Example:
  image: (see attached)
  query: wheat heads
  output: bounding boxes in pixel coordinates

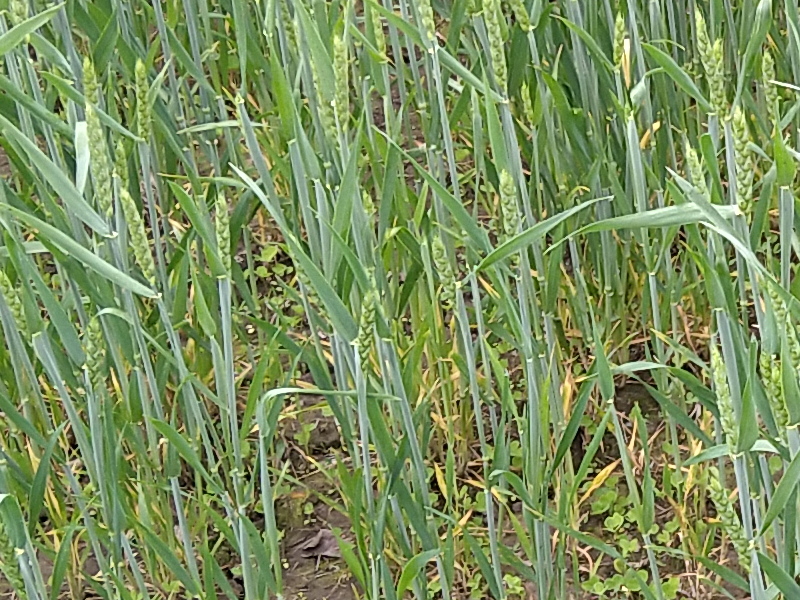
[497,0,529,32]
[761,348,775,396]
[708,335,740,452]
[121,191,152,278]
[431,235,454,306]
[287,242,332,321]
[762,51,778,110]
[84,107,116,221]
[0,269,29,335]
[135,62,151,140]
[685,144,711,202]
[214,194,230,272]
[361,189,376,226]
[313,61,340,146]
[497,171,524,246]
[706,478,751,568]
[369,0,387,55]
[521,82,533,124]
[334,33,349,127]
[275,0,298,51]
[761,278,800,367]
[714,37,724,72]
[482,0,508,87]
[356,289,373,369]
[448,0,477,15]
[116,143,128,183]
[3,0,29,40]
[22,0,56,33]
[312,0,326,15]
[83,55,98,111]
[87,318,104,394]
[407,0,436,42]
[613,15,625,63]
[732,102,753,215]
[771,365,783,426]
[695,6,728,116]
